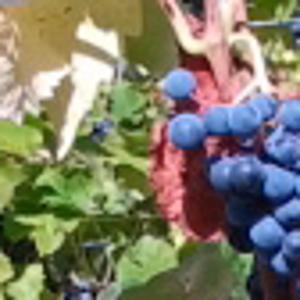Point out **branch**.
Here are the masks:
<instances>
[{"mask_svg":"<svg viewBox=\"0 0 300 300\" xmlns=\"http://www.w3.org/2000/svg\"><path fill=\"white\" fill-rule=\"evenodd\" d=\"M231 0H208L204 20V47L214 82L227 84L236 74L235 51L225 40L230 33L228 17Z\"/></svg>","mask_w":300,"mask_h":300,"instance_id":"1","label":"branch"}]
</instances>
